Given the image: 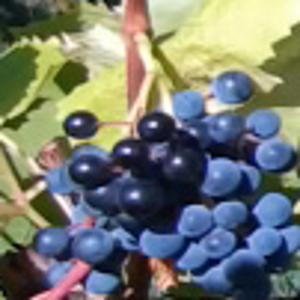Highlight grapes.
<instances>
[{
	"label": "grapes",
	"mask_w": 300,
	"mask_h": 300,
	"mask_svg": "<svg viewBox=\"0 0 300 300\" xmlns=\"http://www.w3.org/2000/svg\"><path fill=\"white\" fill-rule=\"evenodd\" d=\"M174 118L155 111L140 119L138 138L123 137L111 152L77 144L65 165L45 177L51 195L75 203L68 228L38 230L33 254L51 263L40 283L53 288L89 265L83 288L113 296L122 274L109 267L126 254L173 260L209 296L257 287L300 252V225L290 198L260 195L266 174L299 164L294 147L277 139L282 118L272 108L205 115L204 96L176 93Z\"/></svg>",
	"instance_id": "01657485"
},
{
	"label": "grapes",
	"mask_w": 300,
	"mask_h": 300,
	"mask_svg": "<svg viewBox=\"0 0 300 300\" xmlns=\"http://www.w3.org/2000/svg\"><path fill=\"white\" fill-rule=\"evenodd\" d=\"M212 95L220 105L237 106L248 102L254 95V79L243 71L229 70L212 82Z\"/></svg>",
	"instance_id": "b958b902"
},
{
	"label": "grapes",
	"mask_w": 300,
	"mask_h": 300,
	"mask_svg": "<svg viewBox=\"0 0 300 300\" xmlns=\"http://www.w3.org/2000/svg\"><path fill=\"white\" fill-rule=\"evenodd\" d=\"M100 130V123L95 115L88 110H76L69 113L63 120V131L71 140H92Z\"/></svg>",
	"instance_id": "0513c4c2"
}]
</instances>
